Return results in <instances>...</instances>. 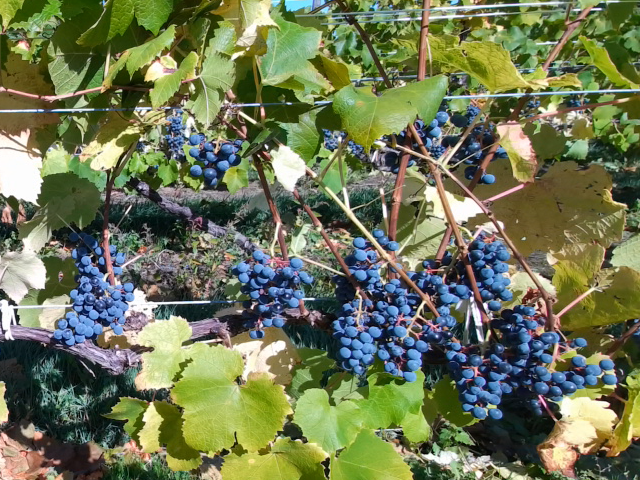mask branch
I'll use <instances>...</instances> for the list:
<instances>
[{"label": "branch", "mask_w": 640, "mask_h": 480, "mask_svg": "<svg viewBox=\"0 0 640 480\" xmlns=\"http://www.w3.org/2000/svg\"><path fill=\"white\" fill-rule=\"evenodd\" d=\"M129 155L128 151H123L117 158L112 172H111V176L107 182V184L105 185L106 188V204H105V210H104V220H103V241H104V255H105V259L107 262V276L110 280V284L114 285L115 284V277L113 276L112 273V259L110 257V253H109V232H108V223H109V213H110V207H111V191H112V184L114 182V180L116 179V175H117V170L120 166V164L122 163L123 159Z\"/></svg>", "instance_id": "branch-6"}, {"label": "branch", "mask_w": 640, "mask_h": 480, "mask_svg": "<svg viewBox=\"0 0 640 480\" xmlns=\"http://www.w3.org/2000/svg\"><path fill=\"white\" fill-rule=\"evenodd\" d=\"M291 192L297 198L299 204L301 205V208L306 213L307 217L309 218L310 222L313 224L314 228L320 233V237L327 243L328 248L331 250V253L335 256L341 270L343 271L344 275L347 277V280L351 283V285L355 289V292L357 293V295L361 297L363 300H367L369 298V295L363 291L360 283L354 277L347 263L345 262L344 257L340 253L339 249L336 247L335 242L327 234V231L324 229L323 225L317 220L315 214L313 213L311 208L308 206V203L306 202V199L304 198L303 194L296 187H293L291 189Z\"/></svg>", "instance_id": "branch-3"}, {"label": "branch", "mask_w": 640, "mask_h": 480, "mask_svg": "<svg viewBox=\"0 0 640 480\" xmlns=\"http://www.w3.org/2000/svg\"><path fill=\"white\" fill-rule=\"evenodd\" d=\"M348 19L350 21V23L352 24V26L357 30V32L359 33V35L362 37L363 41L365 42V45L368 49V53L370 54V57L374 63V66L377 70V72L379 73V75L381 76V78L383 79V82L385 83L386 87L388 89H391L393 87V82L390 80V77L388 76L386 70L384 69L383 65L381 64V61L377 55V52L375 51V47L373 45V42L371 40V38L369 37L368 33L364 30V28L362 27V25L359 23V21L357 20L356 16L354 14H350L348 16Z\"/></svg>", "instance_id": "branch-8"}, {"label": "branch", "mask_w": 640, "mask_h": 480, "mask_svg": "<svg viewBox=\"0 0 640 480\" xmlns=\"http://www.w3.org/2000/svg\"><path fill=\"white\" fill-rule=\"evenodd\" d=\"M527 101H528V98H520V100L514 106L512 112H511V114L509 116V119L511 121H514L517 118L519 112L521 111V109L523 108V106L526 104Z\"/></svg>", "instance_id": "branch-11"}, {"label": "branch", "mask_w": 640, "mask_h": 480, "mask_svg": "<svg viewBox=\"0 0 640 480\" xmlns=\"http://www.w3.org/2000/svg\"><path fill=\"white\" fill-rule=\"evenodd\" d=\"M304 170L308 173L309 178L313 180V183L326 195L330 196L331 199L340 207L342 213L346 216V218L353 224H355V226L365 235V238L372 245V247L376 251H378L388 262V266H392L395 269V271L399 274L400 279L410 288L414 289V291L424 299L427 310L433 316H437L439 314V311L434 307L432 298L416 282H414L407 276L405 270L395 260L397 254L395 252H392L391 250L387 251L374 239V236L369 231V229L365 227V225L357 217H355L356 213L338 196V194L334 190L330 189L320 181V178L316 175L315 171L310 165H306L304 167Z\"/></svg>", "instance_id": "branch-2"}, {"label": "branch", "mask_w": 640, "mask_h": 480, "mask_svg": "<svg viewBox=\"0 0 640 480\" xmlns=\"http://www.w3.org/2000/svg\"><path fill=\"white\" fill-rule=\"evenodd\" d=\"M104 88V85L102 83H99L97 85H95L94 87H89V88H80V89H76V90H70L67 91L59 96H43L41 94H38L36 92H32L29 90H24L15 86H9V87H0V94H15V95H19L22 97H27L30 99H34L36 101H39L41 103H61L69 98L72 97H78V96H82V95H91V94H96L97 92L101 91Z\"/></svg>", "instance_id": "branch-5"}, {"label": "branch", "mask_w": 640, "mask_h": 480, "mask_svg": "<svg viewBox=\"0 0 640 480\" xmlns=\"http://www.w3.org/2000/svg\"><path fill=\"white\" fill-rule=\"evenodd\" d=\"M429 16H430V13L428 11H424L422 13V17L420 18L419 67H418V76H417V79L419 81H423L425 79L427 21L429 19Z\"/></svg>", "instance_id": "branch-10"}, {"label": "branch", "mask_w": 640, "mask_h": 480, "mask_svg": "<svg viewBox=\"0 0 640 480\" xmlns=\"http://www.w3.org/2000/svg\"><path fill=\"white\" fill-rule=\"evenodd\" d=\"M591 13V9L589 7H586L579 16H577L572 23L570 24V26L568 27V29L566 30V32L563 34V36L561 37V39L559 40V42L553 47V49L551 50V52L548 54L547 58L545 59L542 68L544 70H548L550 68V65L552 63V61L554 60V58L556 57V55L559 53V51L566 45V43L568 42V39L571 37V35L575 32V30L577 29L578 25L580 23H582L584 21V19Z\"/></svg>", "instance_id": "branch-9"}, {"label": "branch", "mask_w": 640, "mask_h": 480, "mask_svg": "<svg viewBox=\"0 0 640 480\" xmlns=\"http://www.w3.org/2000/svg\"><path fill=\"white\" fill-rule=\"evenodd\" d=\"M414 122L415 121H411L407 124V128L405 129V137H404V144L399 143L398 141H394L392 139H386L384 141V144L386 146L392 147V148H396L398 151H403L402 154V159L400 161V171L398 172V176H397V180H396V184H395V188H394V199H393V206L390 212V221H389V237L391 239H394L396 237V224H397V214L399 212L400 209V201H401V190H402V186H403V182H404V178H405V171L407 168L406 165V161H407V157L409 155H412L414 158L421 160V161H425L427 163V169L429 170V172L432 175V179L435 185V189L437 191L438 194V200L441 202V205L443 206V212L445 213V216L448 220V227L443 235V238L441 239L440 243H439V247L437 249V252L434 256V260L436 262H439L441 260V258L443 257L444 251L446 249V246L450 240V237L452 236V233L454 232L455 238L459 244V248L461 250V257L462 260L464 262L465 265V270L468 271V275H469V279H470V283L473 289V296L475 298V302L478 305V309L480 314L482 315V323L485 324L488 328L489 334L491 335V337L493 338V340L495 342L499 341V338L496 334V332L493 329L492 326V322L490 321V318L487 317V313L484 309L483 306V302L478 294V286L477 283L475 281V276H474V272L472 269V265L469 262V259L467 258V253H468V248L466 245V242L462 236V232L460 229V226L458 225V223L455 221V218L453 216V213L451 211V206L448 203V200L445 198V192L439 177V173L436 170L435 167H437L446 177H450V179L462 190L464 191L468 197L470 199H472V201L474 202V204L477 206V208L489 219L491 220V222L495 225V227L501 232L504 241L506 242L507 246L509 247V250L513 253V255L515 257L518 258L520 265L522 267V269L524 270V272L526 273V275L529 277V279L532 281V283L537 287L540 296L542 297L543 303H544V308L547 314V321H548V325H547V329L549 331H552L555 328V318H554V312L551 306V301H550V297L545 289V286L541 283V281L537 278V276L534 274V272L531 270V268L529 267L527 260L525 258V256L517 249L516 245L514 244L513 240L511 239V236L509 234V231L507 230V228L501 223V221L487 208V206L485 204H483L481 202V200L479 199V197L475 194V192L473 191L478 182L480 177L482 176L484 170L488 167L490 160L492 158V156L496 153L497 149L499 148V146L497 144H494L485 154L482 163L478 166V170L474 173L473 178L470 181V184L467 186L457 175L454 171L449 170L441 161L437 160L435 157L431 156L429 151L427 150V148H425L423 146V142L422 139L420 137V135L418 134V132L416 131L415 127H414ZM415 138L417 141V146L420 150L417 151L414 148H412L413 146V139Z\"/></svg>", "instance_id": "branch-1"}, {"label": "branch", "mask_w": 640, "mask_h": 480, "mask_svg": "<svg viewBox=\"0 0 640 480\" xmlns=\"http://www.w3.org/2000/svg\"><path fill=\"white\" fill-rule=\"evenodd\" d=\"M259 156H261L265 161H268L270 159V155L268 154V152L264 149H259L256 152H253L251 154V159L253 161L254 164V168H255V173L259 182V185L261 186V189L263 190L264 195L266 196L267 199V205L271 211L272 217H273V224L274 226L277 228L278 231V239H279V247H280V252L282 253L283 256V260L284 261H288L289 257L287 254V247H286V242L284 241V236H283V228L281 226V220H280V215L278 214V210L275 204V200L273 198V194L266 182V179L264 177L263 174V170H262V165L259 159Z\"/></svg>", "instance_id": "branch-4"}, {"label": "branch", "mask_w": 640, "mask_h": 480, "mask_svg": "<svg viewBox=\"0 0 640 480\" xmlns=\"http://www.w3.org/2000/svg\"><path fill=\"white\" fill-rule=\"evenodd\" d=\"M231 111L234 114H236V115L241 117L238 120V123H239L240 127L238 125H236L234 122H232L231 120H229L228 118H226L225 116H222L220 113H217L215 115V118L220 123H223L229 129L233 130L237 135H239L241 137V139L243 141H247L249 139V136L247 135V132H248L247 123L252 125L253 127L257 128L258 130H261L263 128V124L260 121L252 118L250 115H248L241 108H231Z\"/></svg>", "instance_id": "branch-7"}]
</instances>
